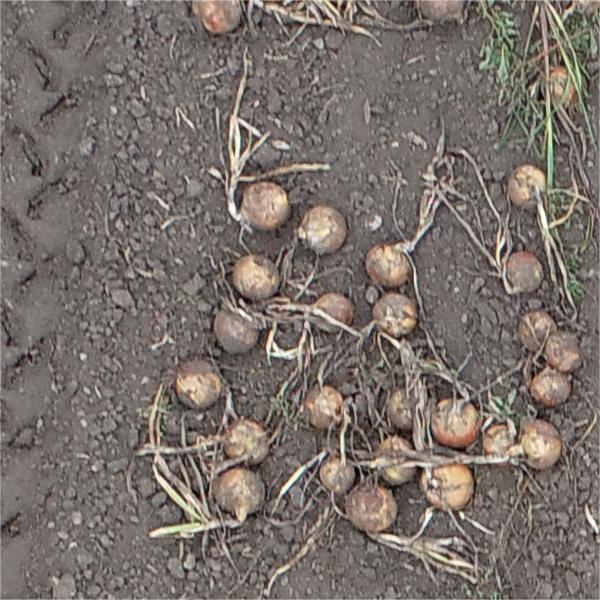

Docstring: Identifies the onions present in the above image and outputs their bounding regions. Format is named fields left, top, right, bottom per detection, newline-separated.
left=302, top=386, right=343, bottom=428
left=318, top=456, right=353, bottom=491
left=215, top=309, right=259, bottom=352
left=537, top=68, right=573, bottom=105
left=210, top=466, right=264, bottom=517
left=343, top=482, right=393, bottom=530
left=225, top=418, right=267, bottom=461
left=174, top=362, right=221, bottom=408
left=374, top=436, right=412, bottom=483
left=517, top=419, right=561, bottom=465
left=383, top=389, right=414, bottom=428
left=268, top=315, right=303, bottom=356
left=426, top=464, right=472, bottom=508
left=196, top=0, right=240, bottom=33
left=299, top=206, right=346, bottom=252
left=500, top=251, right=542, bottom=294
left=374, top=293, right=417, bottom=334
left=312, top=292, right=352, bottom=326
left=365, top=244, right=409, bottom=285
left=481, top=422, right=511, bottom=458
left=419, top=0, right=462, bottom=22
left=433, top=400, right=478, bottom=445
left=240, top=181, right=288, bottom=227
left=506, top=165, right=544, bottom=206
left=517, top=308, right=554, bottom=350
left=233, top=253, right=277, bottom=298
left=543, top=330, right=581, bottom=369
left=528, top=368, right=568, bottom=406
